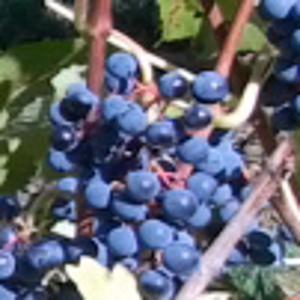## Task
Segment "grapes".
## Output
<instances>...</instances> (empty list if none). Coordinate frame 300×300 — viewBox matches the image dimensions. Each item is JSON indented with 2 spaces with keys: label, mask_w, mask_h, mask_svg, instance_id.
<instances>
[{
  "label": "grapes",
  "mask_w": 300,
  "mask_h": 300,
  "mask_svg": "<svg viewBox=\"0 0 300 300\" xmlns=\"http://www.w3.org/2000/svg\"><path fill=\"white\" fill-rule=\"evenodd\" d=\"M107 92L90 95L69 83L63 100L49 109L55 127L45 151L48 168L70 173L59 179L64 195L81 198L94 218L90 238H37L25 249L35 273L80 265L83 255L103 267L121 263L137 269L144 248L159 252V267L135 278L142 300H172L179 277L188 275L201 253L189 229L227 222L241 195L244 159L234 150L230 131L210 130L209 104L229 93L225 75L200 73L187 88L176 71L163 73L158 87L135 86L137 57L114 52L105 61Z\"/></svg>",
  "instance_id": "01657485"
},
{
  "label": "grapes",
  "mask_w": 300,
  "mask_h": 300,
  "mask_svg": "<svg viewBox=\"0 0 300 300\" xmlns=\"http://www.w3.org/2000/svg\"><path fill=\"white\" fill-rule=\"evenodd\" d=\"M261 21L272 23L266 31L271 47L283 52L276 62V73L260 88V100L275 110L270 122L275 131L300 125V0H259Z\"/></svg>",
  "instance_id": "b958b902"
},
{
  "label": "grapes",
  "mask_w": 300,
  "mask_h": 300,
  "mask_svg": "<svg viewBox=\"0 0 300 300\" xmlns=\"http://www.w3.org/2000/svg\"><path fill=\"white\" fill-rule=\"evenodd\" d=\"M246 244L238 243L225 257L227 267L236 269L247 260L261 266H272L281 263L286 255L284 243L271 238L269 231L254 229L247 232Z\"/></svg>",
  "instance_id": "0513c4c2"
},
{
  "label": "grapes",
  "mask_w": 300,
  "mask_h": 300,
  "mask_svg": "<svg viewBox=\"0 0 300 300\" xmlns=\"http://www.w3.org/2000/svg\"><path fill=\"white\" fill-rule=\"evenodd\" d=\"M14 245V233L10 224L0 223V300H38L37 290L28 288L24 292L13 291L5 280L13 277L17 271V261L11 250Z\"/></svg>",
  "instance_id": "84f90ec7"
},
{
  "label": "grapes",
  "mask_w": 300,
  "mask_h": 300,
  "mask_svg": "<svg viewBox=\"0 0 300 300\" xmlns=\"http://www.w3.org/2000/svg\"><path fill=\"white\" fill-rule=\"evenodd\" d=\"M50 212L52 216L61 218L68 223H74L80 217L79 205L73 199L59 200L52 203Z\"/></svg>",
  "instance_id": "f8a65327"
},
{
  "label": "grapes",
  "mask_w": 300,
  "mask_h": 300,
  "mask_svg": "<svg viewBox=\"0 0 300 300\" xmlns=\"http://www.w3.org/2000/svg\"><path fill=\"white\" fill-rule=\"evenodd\" d=\"M20 203L14 197L4 196L0 198V218L10 220L18 215Z\"/></svg>",
  "instance_id": "5460f4e3"
}]
</instances>
